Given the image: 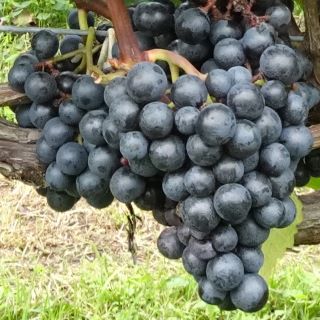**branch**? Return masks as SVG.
I'll use <instances>...</instances> for the list:
<instances>
[{
  "instance_id": "branch-1",
  "label": "branch",
  "mask_w": 320,
  "mask_h": 320,
  "mask_svg": "<svg viewBox=\"0 0 320 320\" xmlns=\"http://www.w3.org/2000/svg\"><path fill=\"white\" fill-rule=\"evenodd\" d=\"M80 29L88 30L87 12L109 18L114 26L118 56L110 60L113 69L129 72L136 63L148 61L139 47L131 26L125 0H75Z\"/></svg>"
}]
</instances>
